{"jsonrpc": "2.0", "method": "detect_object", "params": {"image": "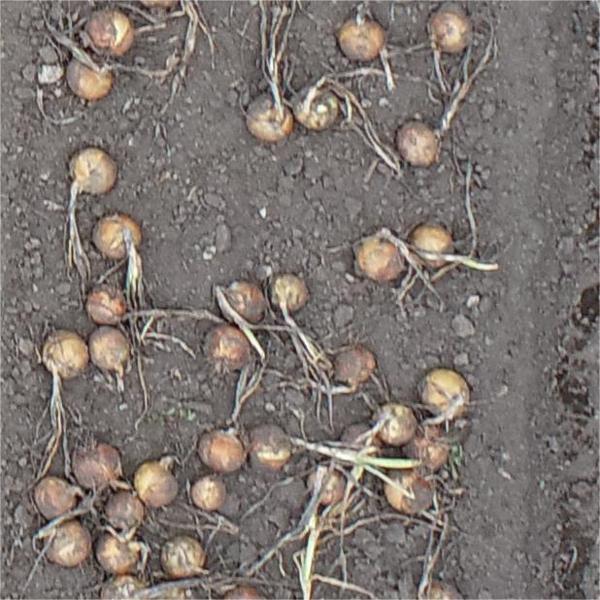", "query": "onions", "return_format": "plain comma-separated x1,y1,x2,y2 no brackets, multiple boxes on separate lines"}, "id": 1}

394,122,438,167
331,346,373,382
161,534,205,575
42,331,88,377
250,425,292,469
336,17,384,59
222,584,266,600
87,10,133,53
341,423,381,456
354,236,401,283
386,473,430,512
421,580,462,600
69,62,111,99
45,521,90,566
32,476,77,517
409,220,450,266
269,274,308,311
103,575,140,599
205,327,250,368
294,87,338,129
246,99,290,140
317,468,346,505
375,405,414,445
422,366,469,415
86,326,131,370
101,490,142,530
70,148,115,192
73,441,122,488
225,282,264,320
92,214,140,256
429,10,470,53
97,530,142,572
189,473,224,509
135,464,179,507
202,430,243,472
417,439,448,469
87,286,124,323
